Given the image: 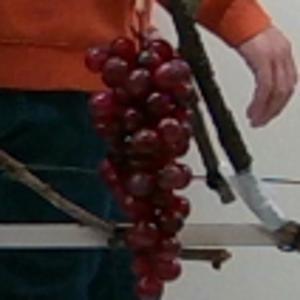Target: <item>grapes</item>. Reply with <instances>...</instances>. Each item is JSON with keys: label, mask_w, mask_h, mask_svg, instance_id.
Masks as SVG:
<instances>
[{"label": "grapes", "mask_w": 300, "mask_h": 300, "mask_svg": "<svg viewBox=\"0 0 300 300\" xmlns=\"http://www.w3.org/2000/svg\"><path fill=\"white\" fill-rule=\"evenodd\" d=\"M82 65L114 87L93 98L88 112L99 136L112 141L98 162L104 186L115 191L119 211L135 227L110 244L119 260L130 258L140 277L130 287L134 300H161L165 281L183 273L177 239L191 215L181 192L195 180L193 169L176 163L192 145L203 124L196 105L199 93L187 83L191 67L167 38L148 41L137 51L128 35L113 38L108 48L91 45Z\"/></svg>", "instance_id": "01657485"}]
</instances>
